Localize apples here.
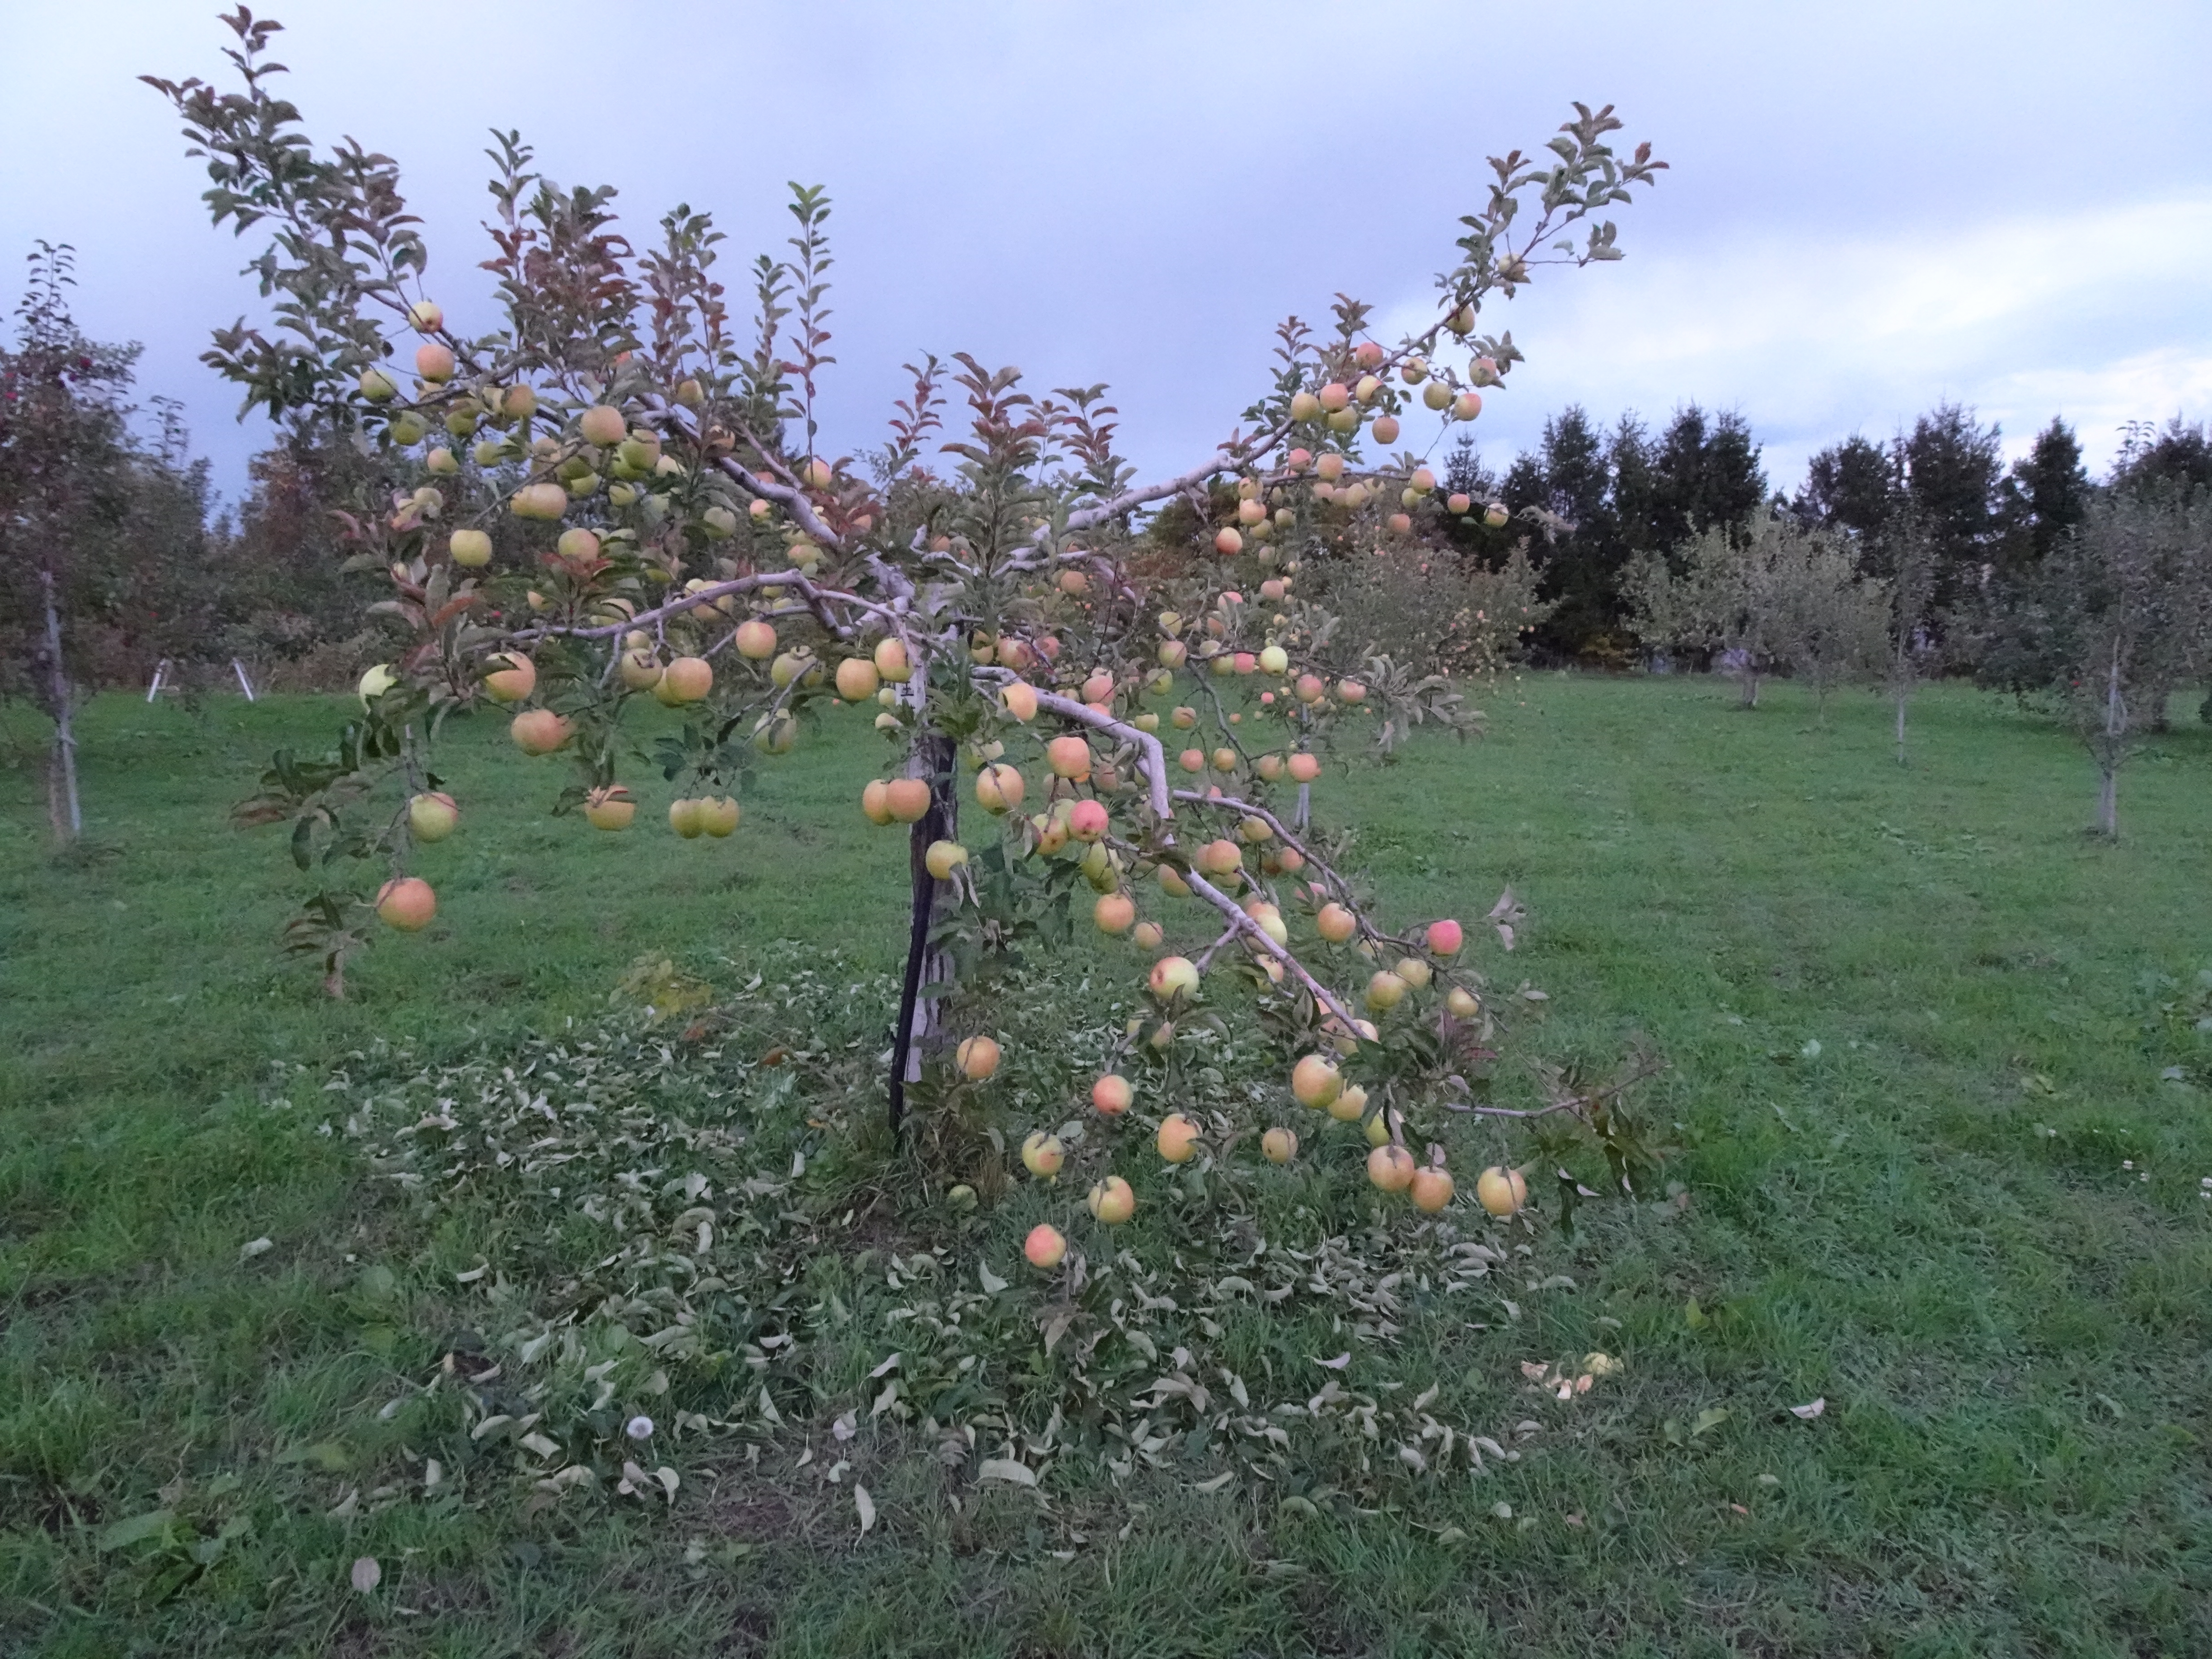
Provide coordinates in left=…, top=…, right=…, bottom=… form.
left=1309, top=996, right=1348, bottom=1038
left=1360, top=478, right=1388, bottom=504
left=1496, top=249, right=1528, bottom=283
left=623, top=628, right=643, bottom=656
left=1316, top=901, right=1358, bottom=943
left=1253, top=543, right=1279, bottom=565
left=1272, top=842, right=1310, bottom=875
left=465, top=380, right=498, bottom=409
left=669, top=795, right=705, bottom=839
left=500, top=377, right=540, bottom=423
left=997, top=681, right=1038, bottom=723
left=948, top=540, right=969, bottom=563
left=415, top=340, right=457, bottom=386
left=1228, top=711, right=1242, bottom=727
left=1443, top=301, right=1477, bottom=336
left=1137, top=709, right=1159, bottom=733
left=619, top=646, right=660, bottom=694
left=748, top=498, right=772, bottom=528
left=559, top=437, right=596, bottom=478
left=1149, top=956, right=1200, bottom=1006
left=1021, top=1130, right=1065, bottom=1178
left=450, top=527, right=492, bottom=569
left=1366, top=1144, right=1415, bottom=1194
left=1361, top=1104, right=1407, bottom=1148
left=1271, top=610, right=1288, bottom=631
left=386, top=500, right=424, bottom=533
left=1065, top=534, right=1103, bottom=562
left=417, top=379, right=458, bottom=408
left=698, top=797, right=741, bottom=837
left=964, top=737, right=1007, bottom=772
left=1210, top=745, right=1237, bottom=772
left=1246, top=914, right=1288, bottom=953
left=1367, top=969, right=1411, bottom=1014
left=1295, top=673, right=1323, bottom=704
left=1273, top=505, right=1301, bottom=532
left=1245, top=900, right=1281, bottom=930
left=415, top=486, right=444, bottom=517
left=1052, top=669, right=1081, bottom=698
left=1238, top=812, right=1278, bottom=844
left=958, top=626, right=994, bottom=664
left=1213, top=525, right=1244, bottom=558
left=526, top=481, right=566, bottom=523
left=690, top=580, right=735, bottom=626
left=702, top=423, right=741, bottom=455
left=1372, top=521, right=1383, bottom=533
left=601, top=476, right=646, bottom=508
left=578, top=402, right=625, bottom=449
left=1033, top=633, right=1062, bottom=661
left=877, top=684, right=907, bottom=716
left=1081, top=675, right=1117, bottom=705
left=789, top=543, right=827, bottom=575
left=567, top=469, right=603, bottom=505
left=1092, top=892, right=1135, bottom=936
left=1192, top=611, right=1229, bottom=643
left=584, top=784, right=636, bottom=828
left=556, top=525, right=601, bottom=572
left=1446, top=492, right=1472, bottom=515
left=974, top=764, right=1026, bottom=815
left=1127, top=654, right=1158, bottom=679
left=1253, top=753, right=1283, bottom=784
left=803, top=458, right=834, bottom=493
left=749, top=467, right=780, bottom=496
left=1205, top=840, right=1243, bottom=877
left=1406, top=1164, right=1454, bottom=1215
left=924, top=582, right=965, bottom=620
left=756, top=577, right=786, bottom=599
left=955, top=1033, right=1000, bottom=1082
left=1245, top=515, right=1279, bottom=540
left=1283, top=704, right=1297, bottom=721
left=535, top=550, right=568, bottom=581
left=509, top=492, right=536, bottom=519
left=660, top=615, right=709, bottom=658
left=1338, top=675, right=1369, bottom=705
left=598, top=596, right=639, bottom=635
left=1236, top=473, right=1265, bottom=502
left=1238, top=496, right=1266, bottom=530
left=923, top=837, right=971, bottom=881
left=860, top=779, right=894, bottom=827
left=1400, top=357, right=1430, bottom=387
left=1048, top=732, right=1091, bottom=777
left=601, top=341, right=637, bottom=376
left=1070, top=759, right=1098, bottom=786
left=647, top=667, right=678, bottom=704
left=534, top=436, right=578, bottom=476
left=358, top=662, right=417, bottom=726
left=1067, top=799, right=1111, bottom=844
left=398, top=496, right=425, bottom=525
left=573, top=528, right=612, bottom=555
left=1194, top=845, right=1226, bottom=878
left=359, top=367, right=401, bottom=405
left=754, top=707, right=802, bottom=755
left=1336, top=1016, right=1380, bottom=1066
left=1169, top=704, right=1199, bottom=730
left=780, top=519, right=820, bottom=551
left=475, top=650, right=538, bottom=705
left=1141, top=799, right=1173, bottom=839
left=1344, top=482, right=1374, bottom=512
left=1217, top=590, right=1244, bottom=619
left=1318, top=381, right=1350, bottom=415
left=1287, top=446, right=1312, bottom=472
left=1258, top=644, right=1289, bottom=677
left=806, top=503, right=834, bottom=533
left=998, top=633, right=1034, bottom=672
left=886, top=779, right=932, bottom=824
left=1040, top=772, right=1077, bottom=800
left=1252, top=708, right=1270, bottom=723
left=1262, top=578, right=1285, bottom=603
left=1077, top=842, right=1119, bottom=883
left=918, top=535, right=952, bottom=564
left=1126, top=676, right=1142, bottom=694
left=405, top=299, right=446, bottom=335
left=1422, top=380, right=1456, bottom=411
left=735, top=619, right=777, bottom=659
left=1084, top=702, right=1116, bottom=723
left=481, top=388, right=524, bottom=432
left=702, top=504, right=738, bottom=546
left=525, top=575, right=560, bottom=614
left=649, top=486, right=685, bottom=524
left=1194, top=782, right=1224, bottom=807
left=1329, top=996, right=1358, bottom=1022
left=1153, top=610, right=1184, bottom=640
left=1579, top=1348, right=1626, bottom=1393
left=1279, top=573, right=1301, bottom=587
left=1178, top=747, right=1206, bottom=774
left=389, top=410, right=428, bottom=446
left=1290, top=392, right=1321, bottom=426
left=1125, top=1008, right=1176, bottom=1057
left=1476, top=1164, right=1528, bottom=1218
left=1402, top=486, right=1425, bottom=510
left=1014, top=515, right=1051, bottom=544
left=1024, top=584, right=1061, bottom=615
left=1355, top=372, right=1383, bottom=407
left=1261, top=689, right=1275, bottom=707
left=1288, top=558, right=1305, bottom=573
left=1159, top=862, right=1202, bottom=897
left=471, top=437, right=506, bottom=467
left=608, top=527, right=639, bottom=556
left=1261, top=1126, right=1299, bottom=1166
left=1286, top=734, right=1304, bottom=753
left=426, top=444, right=455, bottom=476
left=1455, top=393, right=1483, bottom=421
left=947, top=1181, right=978, bottom=1216
left=377, top=874, right=435, bottom=932
left=770, top=595, right=794, bottom=616
left=1370, top=414, right=1401, bottom=447
left=1091, top=1074, right=1134, bottom=1119
left=1286, top=633, right=1301, bottom=646
left=1133, top=919, right=1163, bottom=951
left=978, top=482, right=1006, bottom=508
left=1262, top=634, right=1283, bottom=649
left=503, top=429, right=540, bottom=458
left=1286, top=748, right=1320, bottom=784
left=1383, top=511, right=1411, bottom=535
left=1231, top=653, right=1257, bottom=675
left=1142, top=665, right=1173, bottom=697
left=1021, top=811, right=1066, bottom=857
left=1467, top=358, right=1500, bottom=388
left=651, top=451, right=684, bottom=491
left=824, top=498, right=882, bottom=537
left=1091, top=665, right=1115, bottom=686
left=769, top=652, right=809, bottom=694
left=1310, top=480, right=1335, bottom=505
left=1482, top=501, right=1509, bottom=531
left=1410, top=466, right=1436, bottom=496
left=1392, top=954, right=1434, bottom=992
left=1210, top=648, right=1236, bottom=675
left=684, top=572, right=702, bottom=600
left=710, top=556, right=747, bottom=586
left=1023, top=1220, right=1066, bottom=1271
left=454, top=603, right=499, bottom=645
left=1328, top=1080, right=1374, bottom=1123
left=799, top=657, right=827, bottom=687
left=1355, top=341, right=1383, bottom=372
left=1087, top=1175, right=1136, bottom=1227
left=1423, top=918, right=1466, bottom=957
left=834, top=655, right=876, bottom=703
left=663, top=518, right=712, bottom=563
left=1052, top=686, right=1082, bottom=715
left=744, top=601, right=772, bottom=625
left=1444, top=983, right=1485, bottom=1022
left=390, top=551, right=425, bottom=586
left=1293, top=880, right=1330, bottom=911
left=874, top=635, right=919, bottom=684
left=509, top=707, right=565, bottom=758
left=1279, top=685, right=1292, bottom=701
left=1155, top=1109, right=1206, bottom=1166
left=1293, top=1051, right=1343, bottom=1108
left=668, top=373, right=707, bottom=407
left=1046, top=798, right=1081, bottom=837
left=640, top=544, right=680, bottom=584
left=605, top=446, right=648, bottom=476
left=440, top=396, right=485, bottom=437
left=1090, top=757, right=1128, bottom=796
left=669, top=657, right=714, bottom=701
left=1352, top=932, right=1386, bottom=965
left=1144, top=580, right=1166, bottom=602
left=873, top=710, right=904, bottom=735
left=1257, top=848, right=1279, bottom=873
left=343, top=521, right=379, bottom=556
left=1156, top=637, right=1189, bottom=669
left=1331, top=485, right=1354, bottom=511
left=619, top=426, right=662, bottom=471
left=1252, top=953, right=1286, bottom=996
left=789, top=643, right=814, bottom=664
left=405, top=793, right=459, bottom=844
left=1127, top=835, right=1158, bottom=871
left=1316, top=451, right=1346, bottom=482
left=1324, top=405, right=1355, bottom=434
left=1057, top=567, right=1089, bottom=600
